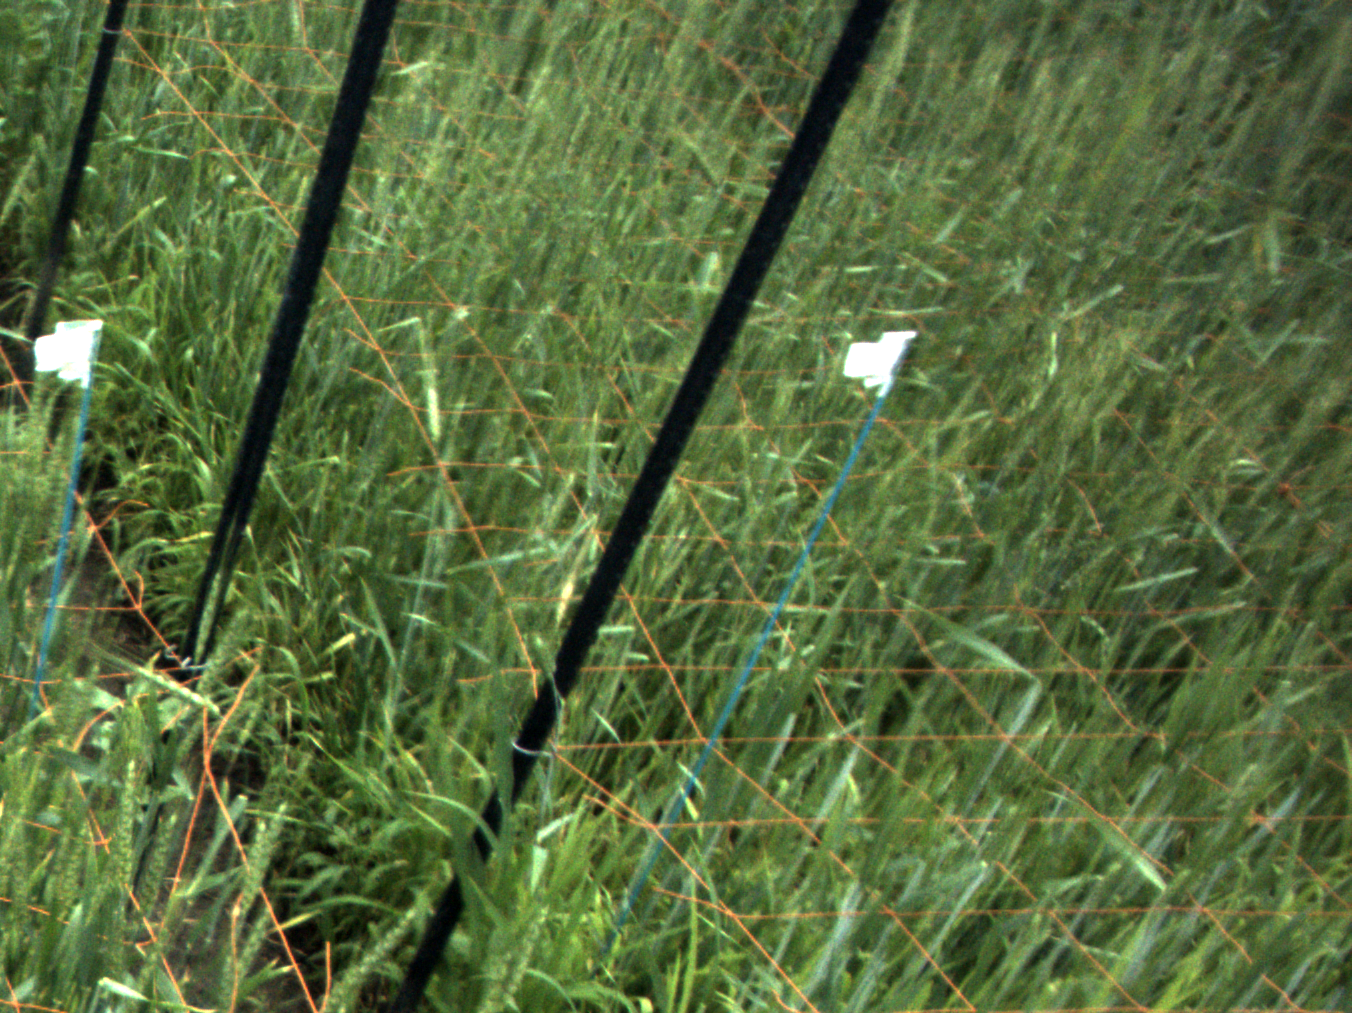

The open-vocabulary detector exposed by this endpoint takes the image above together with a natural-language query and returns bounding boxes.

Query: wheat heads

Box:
[518,303,552,353]
[0,930,8,1012]
[508,897,551,994]
[590,41,615,79]
[102,926,172,1013]
[891,9,915,80]
[13,822,29,943]
[117,695,146,763]
[547,471,577,530]
[888,854,913,904]
[684,144,718,186]
[237,905,273,980]
[87,799,149,917]
[1083,863,1121,910]
[989,161,1023,204]
[1016,86,1054,159]
[177,710,206,756]
[461,51,490,134]
[542,489,556,519]
[240,800,286,905]
[77,603,95,654]
[864,49,896,117]
[61,606,81,654]
[231,701,261,754]
[372,175,388,219]
[569,102,591,147]
[247,819,265,858]
[1065,544,1111,587]
[0,617,14,671]
[57,826,84,907]
[134,809,179,918]
[67,663,102,740]
[849,795,874,867]
[30,393,57,463]
[1224,763,1257,814]
[0,154,35,231]
[113,757,139,889]
[19,383,43,440]
[33,465,67,565]
[998,429,1035,474]
[288,3,302,47]
[495,122,539,200]
[14,503,40,570]
[210,953,233,1013]
[323,905,416,1012]
[1156,871,1192,910]
[133,661,222,718]
[0,803,29,911]
[529,523,549,560]
[40,434,65,488]
[981,802,1015,864]
[424,387,442,440]
[466,964,513,1013]
[524,64,551,115]
[192,572,220,664]
[42,827,69,905]
[49,665,80,732]
[1015,57,1052,134]
[1219,397,1273,477]
[199,606,249,693]
[108,901,130,972]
